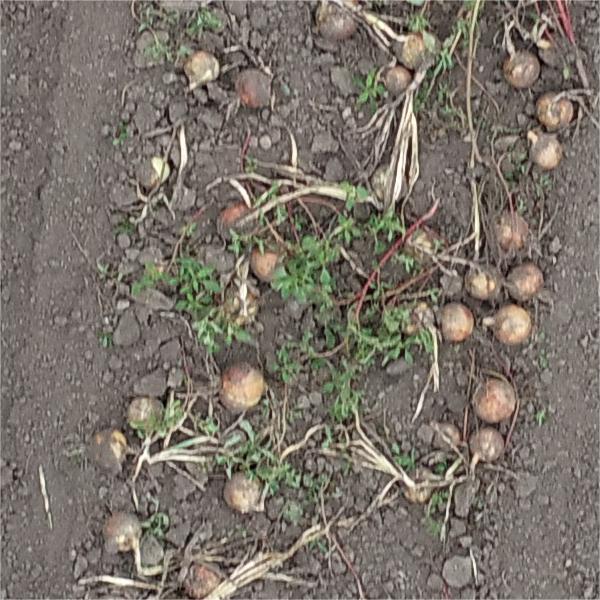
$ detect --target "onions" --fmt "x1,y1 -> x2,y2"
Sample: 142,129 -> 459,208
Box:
492,212 -> 530,253
86,426 -> 126,469
530,135 -> 562,168
182,49 -> 218,86
236,67 -> 270,108
469,428 -> 503,461
489,303 -> 529,343
181,560 -> 221,596
216,202 -> 254,236
371,159 -> 407,200
316,3 -> 352,43
473,376 -> 514,421
136,156 -> 168,190
220,363 -> 263,409
409,226 -> 434,257
103,512 -> 139,550
404,476 -> 430,503
402,303 -> 433,337
535,92 -> 572,127
399,32 -> 433,69
127,396 -> 162,433
380,63 -> 411,93
430,420 -> 458,451
435,301 -> 474,342
501,50 -> 539,87
223,277 -> 258,318
249,248 -> 280,278
222,472 -> 261,511
505,261 -> 542,298
465,265 -> 499,300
